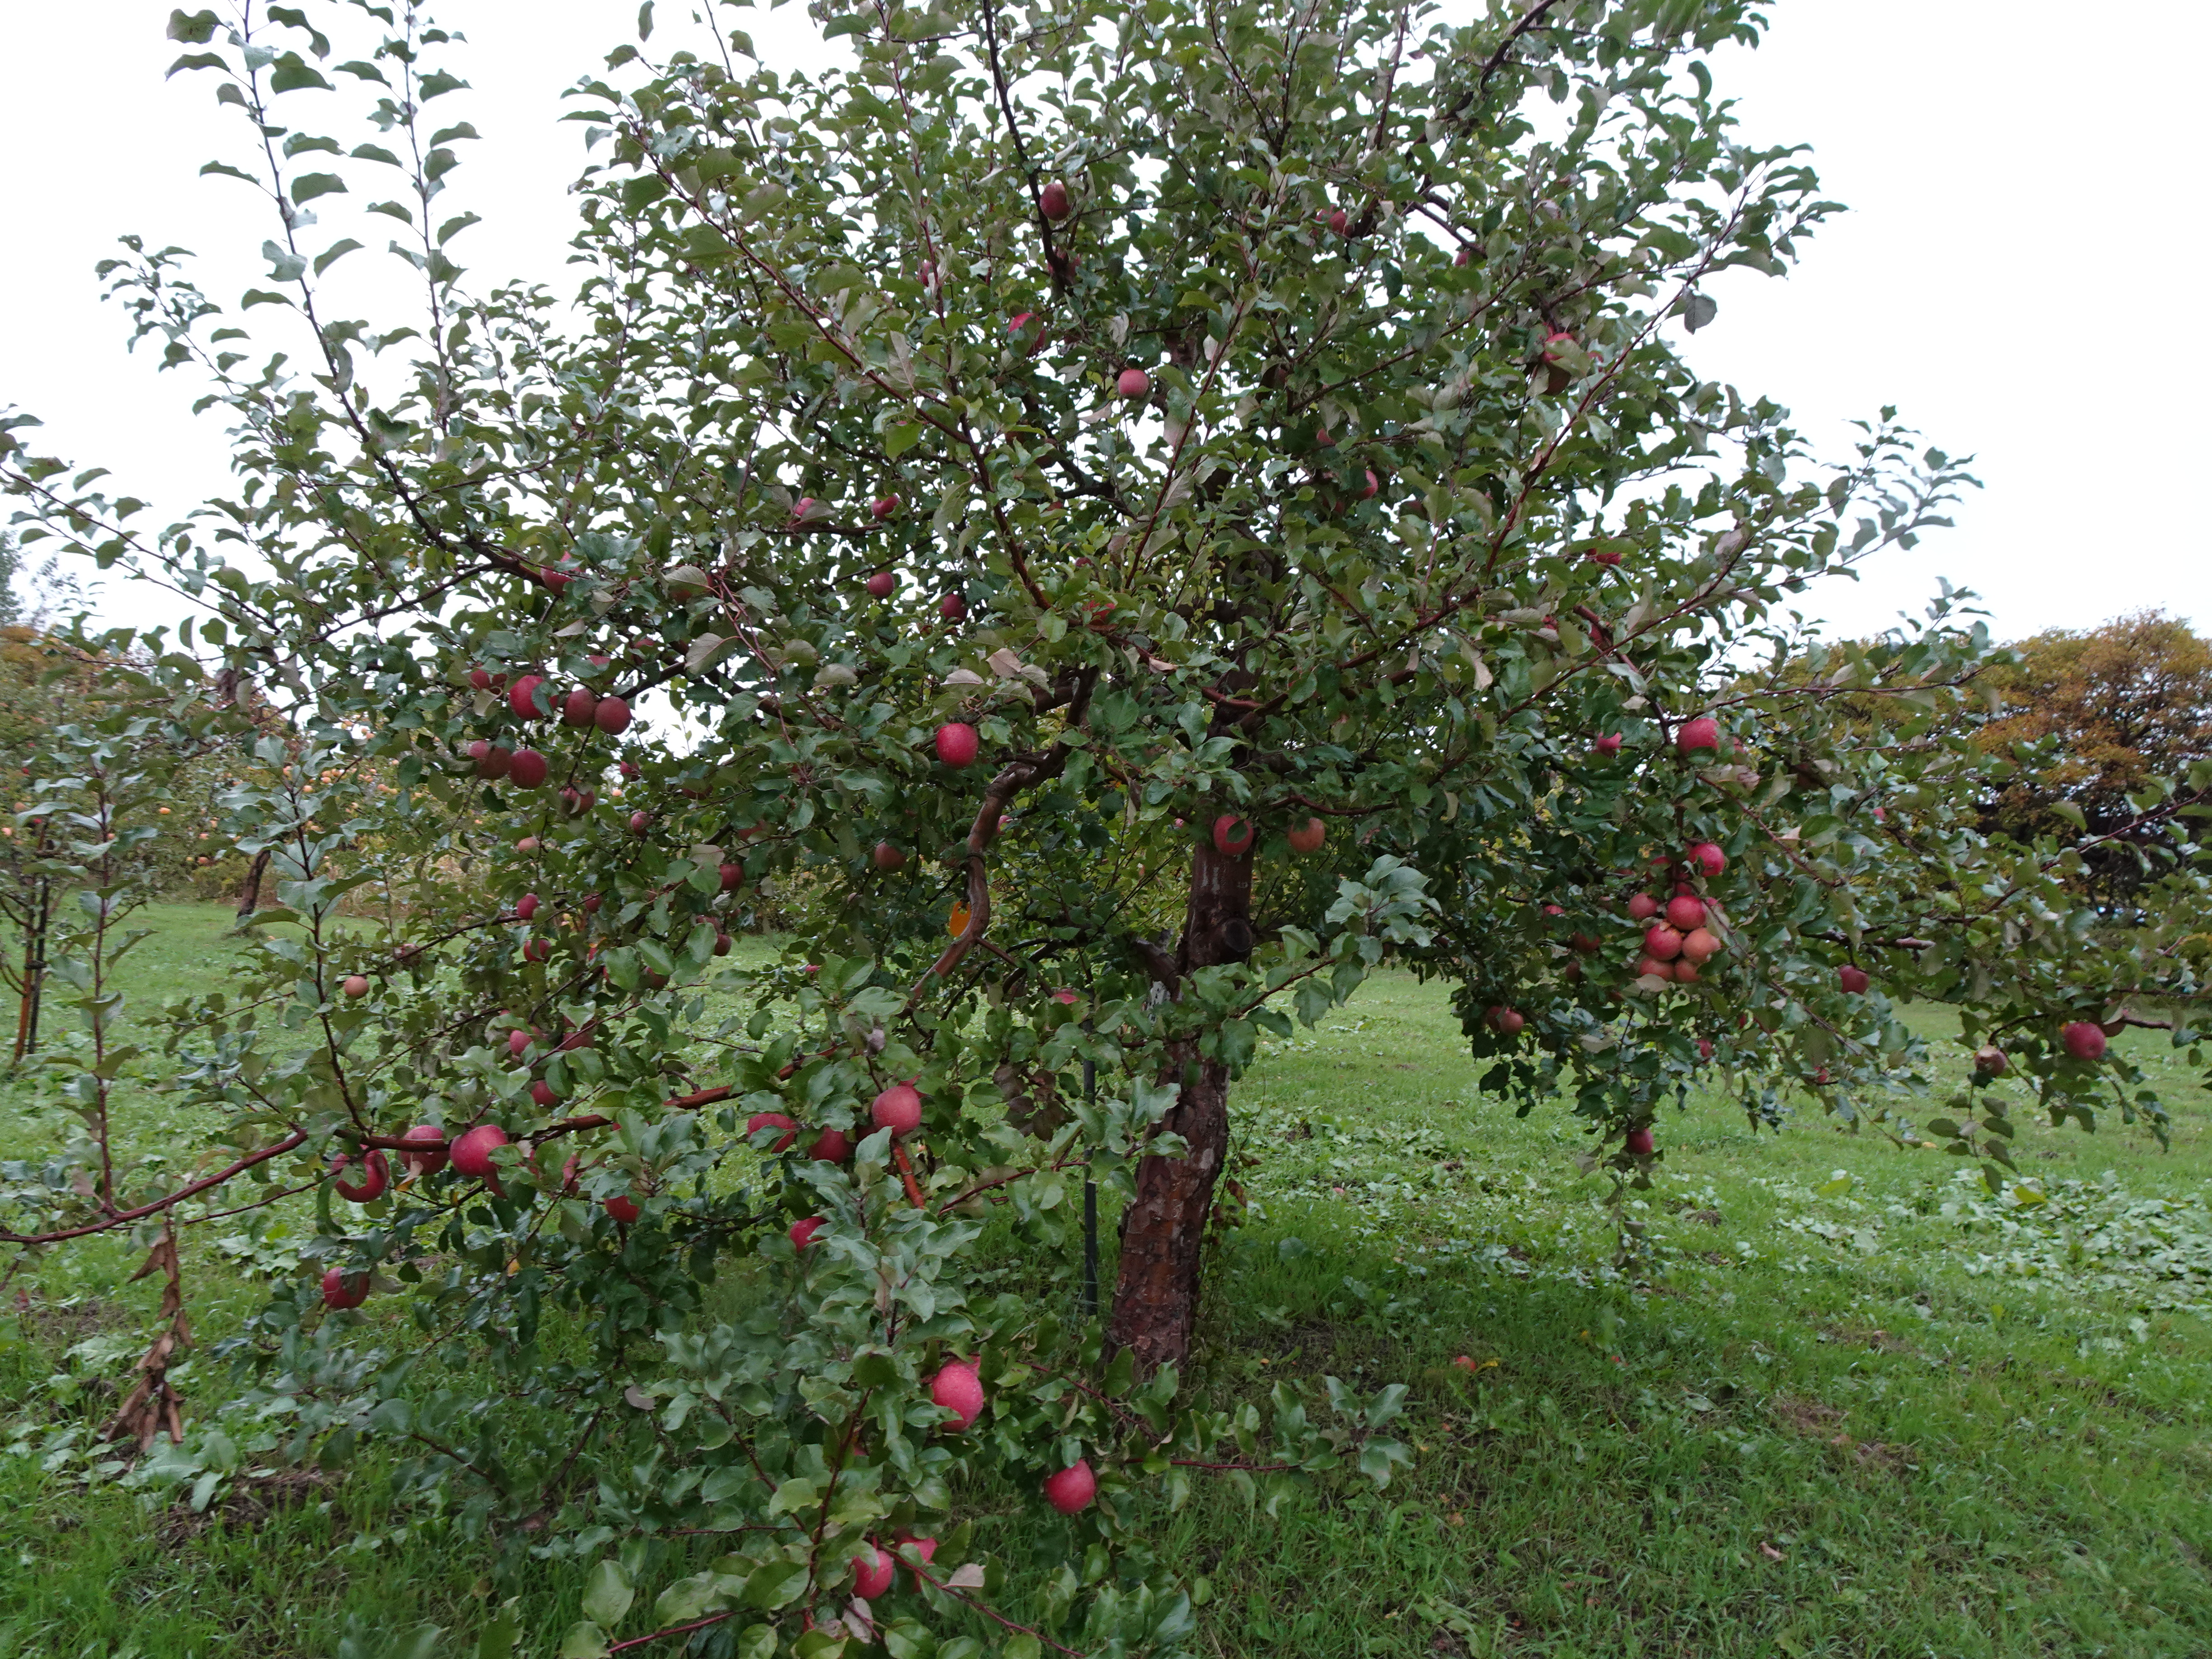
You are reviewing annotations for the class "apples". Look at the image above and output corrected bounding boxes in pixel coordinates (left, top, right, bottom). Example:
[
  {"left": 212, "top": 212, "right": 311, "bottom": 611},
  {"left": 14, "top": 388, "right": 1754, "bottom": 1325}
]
[
  {"left": 1530, "top": 702, "right": 1556, "bottom": 720},
  {"left": 1327, "top": 706, "right": 1360, "bottom": 738},
  {"left": 1603, "top": 981, "right": 1631, "bottom": 1004},
  {"left": 718, "top": 895, "right": 740, "bottom": 922},
  {"left": 626, "top": 807, "right": 659, "bottom": 837},
  {"left": 840, "top": 1542, "right": 895, "bottom": 1601},
  {"left": 1636, "top": 950, "right": 1675, "bottom": 989},
  {"left": 901, "top": 1557, "right": 939, "bottom": 1597},
  {"left": 1483, "top": 488, "right": 1506, "bottom": 508},
  {"left": 1565, "top": 923, "right": 1606, "bottom": 957},
  {"left": 608, "top": 787, "right": 626, "bottom": 804},
  {"left": 1038, "top": 180, "right": 1081, "bottom": 225},
  {"left": 630, "top": 636, "right": 662, "bottom": 671},
  {"left": 1039, "top": 1454, "right": 1096, "bottom": 1521},
  {"left": 519, "top": 933, "right": 558, "bottom": 969},
  {"left": 1694, "top": 1039, "right": 1710, "bottom": 1057},
  {"left": 1713, "top": 734, "right": 1749, "bottom": 769},
  {"left": 695, "top": 909, "right": 724, "bottom": 942},
  {"left": 482, "top": 1159, "right": 542, "bottom": 1215},
  {"left": 1074, "top": 555, "right": 1105, "bottom": 584},
  {"left": 804, "top": 1588, "right": 857, "bottom": 1639},
  {"left": 1682, "top": 928, "right": 1736, "bottom": 969},
  {"left": 588, "top": 936, "right": 622, "bottom": 966},
  {"left": 1524, "top": 614, "right": 1561, "bottom": 651},
  {"left": 912, "top": 1359, "right": 988, "bottom": 1436},
  {"left": 1697, "top": 897, "right": 1725, "bottom": 925},
  {"left": 708, "top": 930, "right": 732, "bottom": 959},
  {"left": 900, "top": 1071, "right": 940, "bottom": 1105},
  {"left": 560, "top": 685, "right": 599, "bottom": 732},
  {"left": 604, "top": 1182, "right": 648, "bottom": 1225},
  {"left": 1286, "top": 813, "right": 1329, "bottom": 855},
  {"left": 1396, "top": 499, "right": 1437, "bottom": 529},
  {"left": 1114, "top": 365, "right": 1151, "bottom": 405},
  {"left": 643, "top": 961, "right": 672, "bottom": 993},
  {"left": 582, "top": 887, "right": 611, "bottom": 916},
  {"left": 561, "top": 1149, "right": 610, "bottom": 1199},
  {"left": 1286, "top": 662, "right": 1327, "bottom": 701},
  {"left": 1484, "top": 1003, "right": 1515, "bottom": 1034},
  {"left": 695, "top": 65, "right": 719, "bottom": 91},
  {"left": 328, "top": 1135, "right": 394, "bottom": 1205},
  {"left": 1173, "top": 815, "right": 1194, "bottom": 837},
  {"left": 1540, "top": 901, "right": 1571, "bottom": 937},
  {"left": 1045, "top": 502, "right": 1066, "bottom": 522},
  {"left": 1314, "top": 424, "right": 1348, "bottom": 452},
  {"left": 1213, "top": 811, "right": 1255, "bottom": 858},
  {"left": 869, "top": 490, "right": 909, "bottom": 527},
  {"left": 1003, "top": 309, "right": 1054, "bottom": 360},
  {"left": 612, "top": 1115, "right": 649, "bottom": 1143},
  {"left": 1620, "top": 1125, "right": 1655, "bottom": 1156},
  {"left": 526, "top": 1072, "right": 574, "bottom": 1110},
  {"left": 538, "top": 544, "right": 584, "bottom": 599},
  {"left": 1675, "top": 715, "right": 1724, "bottom": 767},
  {"left": 1136, "top": 861, "right": 1161, "bottom": 882},
  {"left": 1304, "top": 199, "right": 1357, "bottom": 247},
  {"left": 459, "top": 655, "right": 508, "bottom": 702},
  {"left": 855, "top": 1112, "right": 892, "bottom": 1150},
  {"left": 508, "top": 750, "right": 548, "bottom": 795},
  {"left": 785, "top": 494, "right": 829, "bottom": 535},
  {"left": 1050, "top": 991, "right": 1088, "bottom": 1026},
  {"left": 802, "top": 962, "right": 826, "bottom": 983},
  {"left": 936, "top": 590, "right": 968, "bottom": 626},
  {"left": 1529, "top": 356, "right": 1574, "bottom": 397},
  {"left": 1046, "top": 246, "right": 1084, "bottom": 281},
  {"left": 887, "top": 1515, "right": 941, "bottom": 1570},
  {"left": 1585, "top": 533, "right": 1624, "bottom": 568},
  {"left": 2066, "top": 1020, "right": 2106, "bottom": 1059},
  {"left": 845, "top": 1426, "right": 888, "bottom": 1465},
  {"left": 996, "top": 813, "right": 1020, "bottom": 835},
  {"left": 513, "top": 1151, "right": 544, "bottom": 1190},
  {"left": 1537, "top": 329, "right": 1579, "bottom": 369},
  {"left": 900, "top": 795, "right": 925, "bottom": 819},
  {"left": 1451, "top": 240, "right": 1506, "bottom": 292},
  {"left": 1976, "top": 1048, "right": 2003, "bottom": 1076},
  {"left": 341, "top": 971, "right": 370, "bottom": 1001},
  {"left": 1344, "top": 466, "right": 1382, "bottom": 499},
  {"left": 1643, "top": 854, "right": 1677, "bottom": 891},
  {"left": 508, "top": 671, "right": 559, "bottom": 725},
  {"left": 665, "top": 564, "right": 714, "bottom": 605},
  {"left": 864, "top": 565, "right": 896, "bottom": 605},
  {"left": 618, "top": 752, "right": 645, "bottom": 782},
  {"left": 1583, "top": 619, "right": 1618, "bottom": 653},
  {"left": 508, "top": 1019, "right": 556, "bottom": 1067},
  {"left": 669, "top": 629, "right": 695, "bottom": 655},
  {"left": 512, "top": 888, "right": 545, "bottom": 922},
  {"left": 1684, "top": 839, "right": 1724, "bottom": 881},
  {"left": 867, "top": 1080, "right": 925, "bottom": 1141},
  {"left": 612, "top": 569, "right": 643, "bottom": 594},
  {"left": 560, "top": 1025, "right": 599, "bottom": 1061},
  {"left": 418, "top": 580, "right": 446, "bottom": 612},
  {"left": 396, "top": 1122, "right": 450, "bottom": 1179},
  {"left": 1474, "top": 708, "right": 1497, "bottom": 729},
  {"left": 1565, "top": 958, "right": 1591, "bottom": 985},
  {"left": 392, "top": 941, "right": 423, "bottom": 972},
  {"left": 1312, "top": 489, "right": 1348, "bottom": 519},
  {"left": 515, "top": 833, "right": 546, "bottom": 871},
  {"left": 466, "top": 734, "right": 513, "bottom": 784},
  {"left": 1640, "top": 919, "right": 1685, "bottom": 962},
  {"left": 784, "top": 1211, "right": 835, "bottom": 1262},
  {"left": 1497, "top": 1010, "right": 1526, "bottom": 1044},
  {"left": 1450, "top": 138, "right": 1467, "bottom": 157},
  {"left": 1627, "top": 889, "right": 1663, "bottom": 923},
  {"left": 1537, "top": 764, "right": 1559, "bottom": 784},
  {"left": 450, "top": 1121, "right": 511, "bottom": 1183},
  {"left": 562, "top": 908, "right": 588, "bottom": 932},
  {"left": 1672, "top": 952, "right": 1706, "bottom": 986},
  {"left": 712, "top": 858, "right": 746, "bottom": 895},
  {"left": 1580, "top": 345, "right": 1616, "bottom": 376},
  {"left": 787, "top": 755, "right": 815, "bottom": 786},
  {"left": 1592, "top": 722, "right": 1630, "bottom": 761},
  {"left": 321, "top": 1260, "right": 377, "bottom": 1313},
  {"left": 680, "top": 769, "right": 716, "bottom": 803},
  {"left": 603, "top": 960, "right": 629, "bottom": 983},
  {"left": 932, "top": 719, "right": 981, "bottom": 769},
  {"left": 802, "top": 1117, "right": 861, "bottom": 1174},
  {"left": 1839, "top": 965, "right": 1869, "bottom": 992},
  {"left": 593, "top": 693, "right": 636, "bottom": 738},
  {"left": 583, "top": 655, "right": 620, "bottom": 691},
  {"left": 1665, "top": 893, "right": 1709, "bottom": 930},
  {"left": 917, "top": 258, "right": 952, "bottom": 290},
  {"left": 770, "top": 792, "right": 799, "bottom": 820},
  {"left": 745, "top": 1106, "right": 802, "bottom": 1159},
  {"left": 871, "top": 836, "right": 917, "bottom": 881},
  {"left": 1269, "top": 360, "right": 1299, "bottom": 394},
  {"left": 736, "top": 815, "right": 775, "bottom": 847},
  {"left": 552, "top": 774, "right": 601, "bottom": 822},
  {"left": 1079, "top": 585, "right": 1121, "bottom": 635}
]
